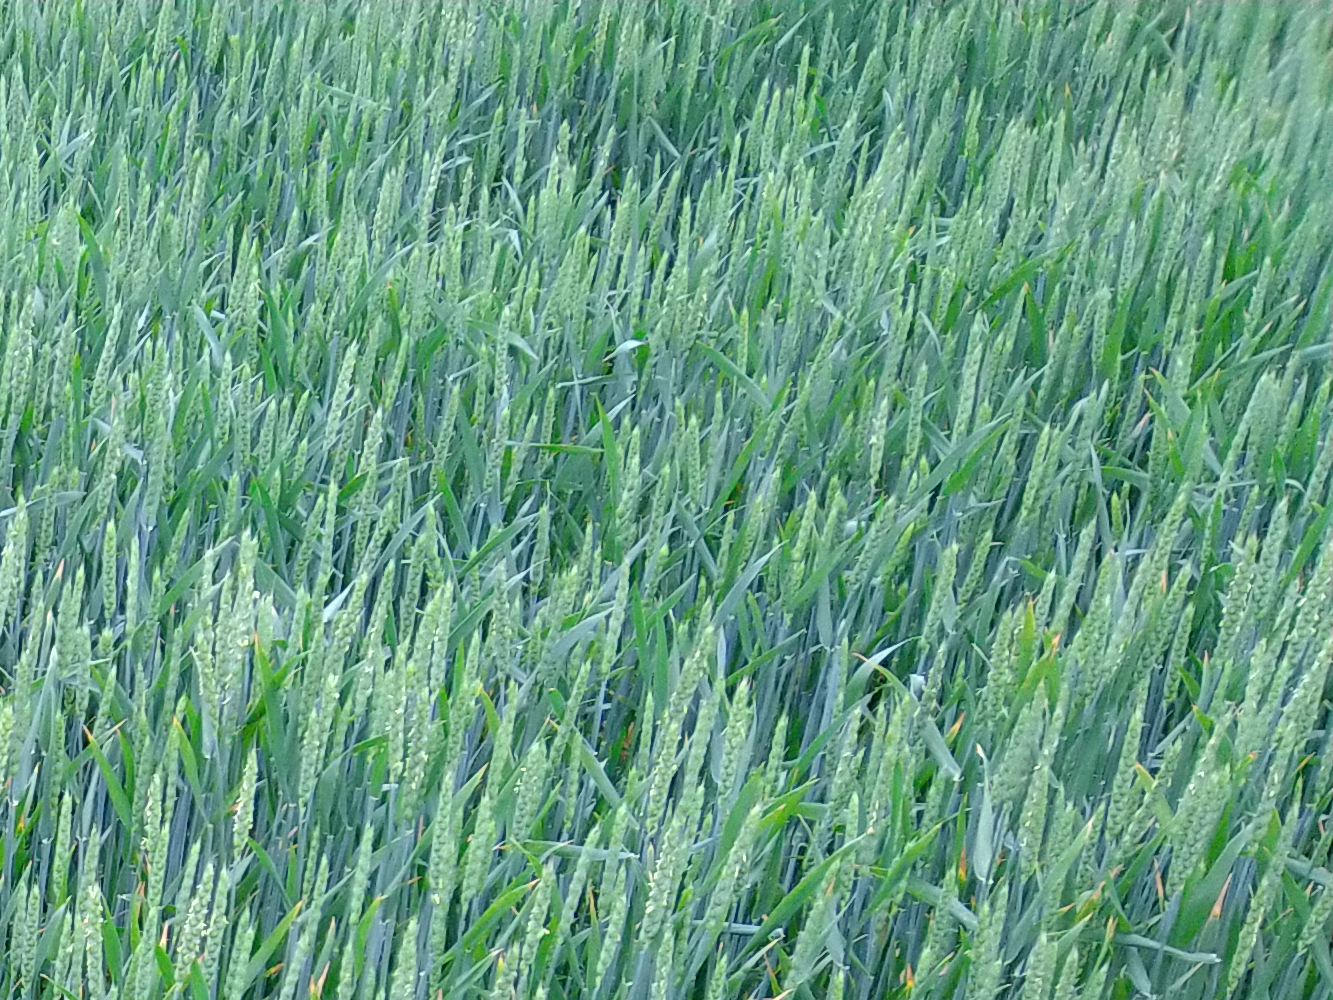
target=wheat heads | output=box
[907,21,919,91]
[1244,644,1264,711]
[105,245,120,306]
[462,796,496,901]
[780,86,794,139]
[229,235,250,309]
[687,418,700,502]
[409,0,420,33]
[0,293,6,322]
[401,539,424,640]
[1017,129,1038,213]
[354,106,375,164]
[1213,119,1249,183]
[466,225,476,267]
[135,914,157,1000]
[898,456,907,501]
[430,590,452,693]
[1175,790,1205,862]
[367,65,372,105]
[1108,358,1119,408]
[1040,488,1060,547]
[102,520,115,608]
[824,497,842,545]
[1116,227,1140,301]
[481,22,491,79]
[297,637,325,732]
[989,125,1017,219]
[1227,371,1260,477]
[175,875,215,982]
[271,935,309,1000]
[525,197,536,235]
[928,876,958,962]
[16,606,49,688]
[16,0,24,50]
[411,99,425,162]
[164,737,177,821]
[35,348,47,419]
[549,664,591,768]
[74,100,90,172]
[13,298,36,408]
[846,501,896,588]
[525,33,542,97]
[42,234,63,289]
[142,570,164,654]
[388,670,404,778]
[813,211,825,257]
[776,145,791,191]
[1167,774,1230,893]
[511,745,546,844]
[684,34,695,117]
[334,32,341,79]
[360,411,383,507]
[302,827,320,901]
[1244,258,1270,337]
[1013,937,1049,1000]
[300,87,312,155]
[903,954,933,1000]
[1269,572,1289,610]
[368,562,396,652]
[399,22,408,72]
[200,548,218,624]
[324,344,357,443]
[255,596,274,646]
[568,285,584,352]
[893,132,940,230]
[129,371,137,420]
[1250,500,1289,614]
[1199,487,1219,562]
[496,306,509,387]
[727,43,743,90]
[1187,198,1216,265]
[269,470,279,507]
[9,511,27,618]
[958,963,1003,1000]
[480,0,490,21]
[299,713,317,806]
[503,416,538,500]
[530,507,549,593]
[307,21,321,68]
[1070,558,1117,667]
[285,393,310,459]
[486,107,504,178]
[214,584,234,656]
[162,509,191,580]
[434,13,450,64]
[393,141,407,203]
[525,0,542,63]
[184,0,196,41]
[646,724,682,829]
[152,627,183,758]
[712,170,723,211]
[710,289,729,325]
[52,792,74,900]
[1269,581,1301,681]
[1159,205,1186,282]
[194,625,218,723]
[870,398,889,482]
[1312,824,1333,867]
[699,598,713,644]
[1144,493,1187,593]
[174,332,182,393]
[52,323,73,410]
[622,170,636,242]
[545,0,555,27]
[318,677,340,763]
[922,11,938,52]
[94,47,111,102]
[76,627,90,718]
[565,50,576,90]
[1027,946,1060,1000]
[964,131,979,190]
[695,181,711,237]
[150,827,171,906]
[823,416,854,473]
[225,227,233,291]
[1076,807,1104,889]
[1295,672,1325,734]
[1199,68,1233,140]
[314,24,333,64]
[1037,326,1070,405]
[599,807,629,917]
[1043,878,1060,942]
[600,196,633,288]
[986,612,1014,723]
[1054,0,1066,50]
[689,814,714,882]
[122,184,150,271]
[1021,429,1049,517]
[380,10,389,41]
[202,351,211,389]
[282,313,294,372]
[160,110,174,165]
[790,491,816,581]
[419,22,430,64]
[662,631,715,726]
[992,396,1027,485]
[30,43,40,92]
[168,431,180,499]
[86,893,103,1000]
[0,167,11,237]
[650,172,680,244]
[1039,951,1080,1000]
[254,378,265,402]
[1202,666,1231,752]
[1173,331,1194,393]
[478,187,490,264]
[662,0,681,78]
[706,955,727,1000]
[474,945,521,1000]
[123,4,142,43]
[675,787,704,872]
[856,379,876,456]
[920,546,957,648]
[14,199,24,275]
[581,525,594,580]
[748,109,765,166]
[117,948,139,1000]
[1111,100,1138,167]
[882,313,906,390]
[1051,522,1097,629]
[1279,235,1306,292]
[243,43,258,92]
[1254,385,1277,483]
[344,223,367,287]
[1093,292,1108,367]
[31,571,45,616]
[1216,188,1245,257]
[1011,134,1027,194]
[641,330,662,397]
[967,98,981,148]
[632,17,641,52]
[692,578,705,635]
[0,415,22,506]
[955,467,988,536]
[905,364,928,467]
[881,528,917,584]
[959,216,981,276]
[805,90,818,131]
[731,135,740,177]
[353,967,375,1000]
[822,638,850,744]
[353,16,364,75]
[260,401,274,468]
[118,157,133,261]
[1046,689,1072,774]
[0,73,5,136]
[461,166,472,234]
[222,591,259,731]
[102,634,116,667]
[953,328,983,439]
[650,251,667,310]
[557,120,570,168]
[765,394,783,454]
[426,548,444,586]
[1066,239,1091,320]
[0,333,15,413]
[593,8,611,75]
[418,155,443,233]
[1191,236,1213,307]
[348,824,374,925]
[876,126,903,182]
[1051,117,1066,193]
[1306,604,1333,669]
[289,28,304,89]
[825,122,855,201]
[513,111,528,190]
[1047,183,1070,259]
[1218,79,1238,128]
[940,333,958,366]
[293,0,305,27]
[1279,643,1333,729]
[1017,770,1048,867]
[206,1,222,66]
[617,428,642,548]
[63,207,77,289]
[132,739,154,834]
[55,570,84,669]
[1020,219,1037,253]
[980,334,1002,405]
[306,855,331,946]
[1080,400,1094,448]
[976,475,1015,547]
[493,561,509,662]
[1060,328,1086,402]
[1037,120,1051,160]
[511,265,528,326]
[762,89,778,168]
[399,693,430,822]
[810,318,842,388]
[1119,374,1145,445]
[724,228,744,292]
[969,220,992,288]
[913,108,926,163]
[958,1,978,57]
[474,346,486,426]
[375,173,392,248]
[1080,293,1113,330]
[783,183,795,256]
[7,293,20,333]
[541,386,555,463]
[433,333,443,377]
[462,547,479,609]
[550,875,589,960]
[838,795,860,905]
[1180,428,1209,491]
[390,919,420,1000]
[59,63,65,112]
[1028,567,1055,654]
[548,327,561,369]
[172,180,192,249]
[768,539,780,598]
[263,38,282,89]
[52,104,65,143]
[717,513,732,577]
[1284,545,1333,667]
[218,353,231,443]
[673,399,684,449]
[746,250,768,301]
[324,230,340,296]
[613,867,629,905]
[639,823,683,940]
[94,428,121,513]
[750,399,760,432]
[1227,876,1278,995]
[327,576,368,671]
[935,253,955,326]
[617,13,630,72]
[564,732,580,831]
[177,388,202,459]
[1179,709,1235,809]
[1242,666,1290,758]
[237,534,259,592]
[823,970,844,1000]
[1098,65,1128,159]
[1012,685,1047,803]
[1079,41,1103,109]
[1163,606,1195,702]
[916,28,937,111]
[221,927,254,1000]
[279,209,300,275]
[187,153,211,241]
[1150,98,1173,161]
[296,442,307,478]
[1242,727,1298,850]
[322,134,333,161]
[341,103,356,141]
[1235,377,1274,469]
[392,464,406,507]
[551,42,565,86]
[871,706,905,825]
[175,842,200,922]
[428,892,448,994]
[817,16,833,83]
[444,233,460,305]
[1106,154,1135,233]
[101,7,111,32]
[798,168,814,233]
[1125,779,1144,819]
[24,884,40,987]
[289,106,298,167]
[507,44,518,108]
[355,634,381,725]
[706,392,724,464]
[545,159,556,257]
[0,0,7,41]
[127,535,134,634]
[359,326,381,399]
[7,61,25,132]
[827,712,861,810]
[876,1,891,46]
[222,474,238,534]
[255,115,272,175]
[147,343,166,443]
[984,0,998,41]
[315,229,326,284]
[1128,52,1148,112]
[1032,148,1051,215]
[757,177,773,245]
[339,35,351,83]
[518,877,553,984]
[410,248,432,329]
[152,0,172,58]
[924,151,944,197]
[591,547,602,580]
[779,392,809,462]
[679,699,715,810]
[429,504,440,555]
[434,99,446,146]
[784,895,832,989]
[448,688,469,778]
[228,115,239,172]
[137,339,152,388]
[238,364,251,462]
[601,563,630,677]
[361,504,396,576]
[1075,471,1088,530]
[336,945,353,1000]
[717,174,735,246]
[0,550,13,668]
[355,48,367,94]
[1099,571,1148,681]
[992,13,1011,81]
[20,107,37,161]
[500,0,514,23]
[959,529,992,605]
[648,930,675,1000]
[233,751,257,861]
[538,573,580,683]
[838,45,856,89]
[630,246,645,324]
[314,580,327,636]
[298,168,308,187]
[640,692,654,772]
[1163,270,1187,348]
[1107,2,1131,75]
[646,471,668,559]
[1277,375,1308,453]
[743,182,755,220]
[145,417,164,511]
[86,270,98,310]
[503,246,518,290]
[96,667,117,740]
[144,775,160,860]
[1297,885,1333,950]
[1153,567,1193,657]
[1135,191,1161,267]
[544,258,571,324]
[780,245,802,352]
[968,886,1008,997]
[415,394,424,466]
[683,272,714,347]
[1214,538,1257,656]
[381,52,389,100]
[0,704,15,831]
[819,231,829,287]
[648,152,661,219]
[245,268,262,366]
[327,480,340,582]
[1043,285,1060,332]
[907,646,949,767]
[1138,71,1156,140]
[486,684,518,799]
[184,91,199,158]
[1148,421,1170,508]
[409,597,439,690]
[60,384,72,471]
[91,307,121,405]
[150,213,164,264]
[1027,0,1033,31]
[1301,438,1332,512]
[1105,712,1143,839]
[1292,383,1331,477]
[464,628,480,694]
[231,45,240,82]
[885,87,903,137]
[832,182,868,283]
[310,322,324,369]
[596,897,628,985]
[74,915,86,998]
[1029,20,1043,87]
[265,165,282,228]
[737,307,746,377]
[1060,967,1108,1000]
[428,774,454,892]
[342,169,355,256]
[557,167,576,246]
[131,314,139,348]
[850,51,878,122]
[763,716,788,801]
[738,498,764,567]
[77,830,101,917]
[330,391,360,478]
[892,6,907,57]
[48,712,66,816]
[384,342,407,411]
[1112,488,1123,537]
[312,163,328,222]
[704,807,762,928]
[29,161,39,232]
[188,312,202,349]
[1115,744,1182,857]
[662,255,685,334]
[788,104,802,146]
[201,876,231,984]
[921,456,931,489]
[719,682,750,797]
[115,0,133,33]
[78,49,84,94]
[496,19,505,69]
[363,0,375,42]
[938,19,955,89]
[448,10,459,89]
[397,0,404,22]
[857,139,871,192]
[297,304,319,363]
[54,911,72,994]
[1234,487,1259,548]
[11,879,28,984]
[279,591,307,662]
[574,227,587,297]
[799,414,806,447]
[462,0,474,66]
[485,408,509,489]
[913,264,937,340]
[331,698,354,766]
[1155,72,1170,112]
[1083,0,1108,71]
[480,244,502,309]
[825,475,839,514]
[38,472,57,559]
[293,501,322,585]
[521,256,539,334]
[872,885,900,940]
[922,771,947,833]
[988,705,1036,802]
[588,131,615,198]
[740,78,769,157]
[678,201,689,264]
[278,398,289,431]
[431,386,459,482]
[1309,735,1333,811]
[709,0,726,58]
[136,662,143,713]
[1262,779,1299,886]
[558,827,601,937]
[1048,805,1070,873]
[698,0,710,22]
[797,44,809,95]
